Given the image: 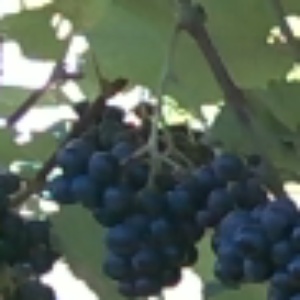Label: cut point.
Returning a JSON list of instances; mask_svg holds the SVG:
<instances>
[{
  "label": "cut point",
  "instance_id": "obj_1",
  "mask_svg": "<svg viewBox=\"0 0 300 300\" xmlns=\"http://www.w3.org/2000/svg\"><path fill=\"white\" fill-rule=\"evenodd\" d=\"M182 29V19L179 16L174 17V25L172 31L169 35V40L167 44V48L165 50L162 68L160 73L158 74V79L156 83L155 89V109L153 114V119L150 124L152 129L159 130L163 123V110H162V97L164 93L165 81L170 73L171 61L173 57V52L175 50V45L177 43L178 35L180 34V30Z\"/></svg>",
  "mask_w": 300,
  "mask_h": 300
}]
</instances>
